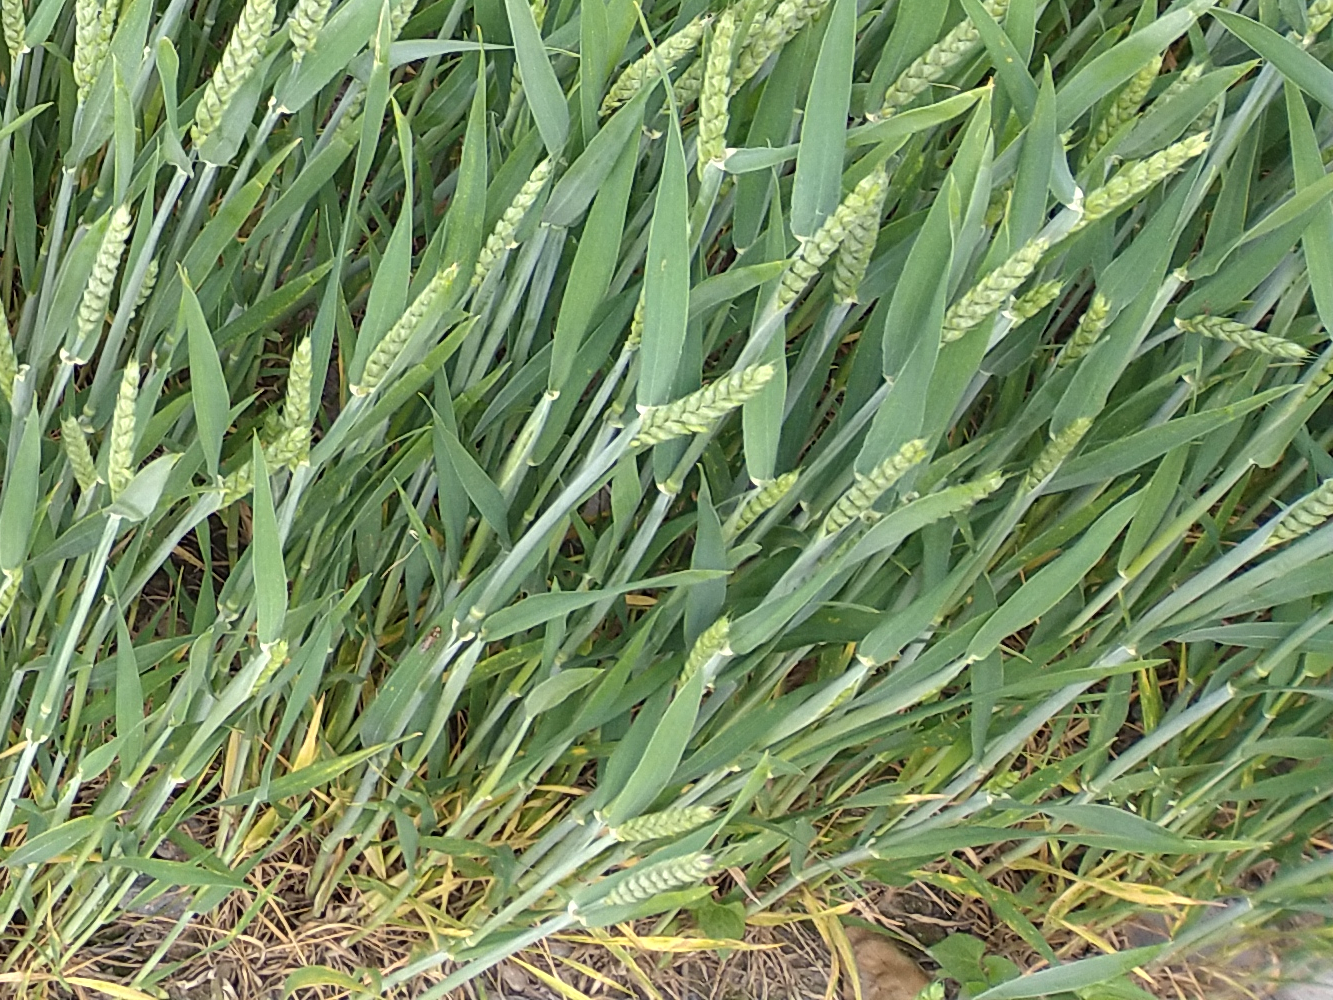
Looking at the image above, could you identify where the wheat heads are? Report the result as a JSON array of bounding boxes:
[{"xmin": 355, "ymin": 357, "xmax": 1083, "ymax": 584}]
[
  {"xmin": 77, "ymin": 204, "xmax": 132, "ymax": 332},
  {"xmin": 1291, "ymin": 0, "xmax": 1333, "ymax": 41},
  {"xmin": 472, "ymin": 162, "xmax": 558, "ymax": 289},
  {"xmin": 725, "ymin": 0, "xmax": 829, "ymax": 93},
  {"xmin": 1269, "ymin": 487, "xmax": 1333, "ymax": 545},
  {"xmin": 737, "ymin": 474, "xmax": 800, "ymax": 530},
  {"xmin": 788, "ymin": 0, "xmax": 857, "ymax": 38},
  {"xmin": 1016, "ymin": 277, "xmax": 1059, "ymax": 321},
  {"xmin": 1075, "ymin": 146, "xmax": 1208, "ymax": 233},
  {"xmin": 927, "ymin": 474, "xmax": 1004, "ymax": 523},
  {"xmin": 285, "ymin": 337, "xmax": 311, "ymax": 465},
  {"xmin": 192, "ymin": 0, "xmax": 276, "ymax": 151},
  {"xmin": 1152, "ymin": 68, "xmax": 1202, "ymax": 117},
  {"xmin": 133, "ymin": 260, "xmax": 158, "ymax": 316},
  {"xmin": 505, "ymin": 6, "xmax": 538, "ymax": 120},
  {"xmin": 363, "ymin": 266, "xmax": 458, "ymax": 397},
  {"xmin": 683, "ymin": 618, "xmax": 730, "ymax": 690},
  {"xmin": 696, "ymin": 11, "xmax": 734, "ymax": 174},
  {"xmin": 97, "ymin": 0, "xmax": 126, "ymax": 55},
  {"xmin": 622, "ymin": 291, "xmax": 646, "ymax": 346},
  {"xmin": 109, "ymin": 356, "xmax": 139, "ymax": 495},
  {"xmin": 1074, "ymin": 52, "xmax": 1162, "ymax": 174},
  {"xmin": 780, "ymin": 176, "xmax": 876, "ymax": 310},
  {"xmin": 1028, "ymin": 420, "xmax": 1088, "ymax": 490},
  {"xmin": 722, "ymin": 0, "xmax": 800, "ymax": 45},
  {"xmin": 1056, "ymin": 293, "xmax": 1110, "ymax": 371},
  {"xmin": 60, "ymin": 415, "xmax": 94, "ymax": 495},
  {"xmin": 256, "ymin": 644, "xmax": 285, "ymax": 689},
  {"xmin": 824, "ymin": 439, "xmax": 929, "ymax": 532},
  {"xmin": 1185, "ymin": 93, "xmax": 1220, "ymax": 142},
  {"xmin": 222, "ymin": 424, "xmax": 311, "ymax": 506},
  {"xmin": 1185, "ymin": 310, "xmax": 1310, "ymax": 359},
  {"xmin": 1294, "ymin": 360, "xmax": 1333, "ymax": 407},
  {"xmin": 884, "ymin": 0, "xmax": 1011, "ymax": 111},
  {"xmin": 834, "ymin": 515, "xmax": 884, "ymax": 570},
  {"xmin": 635, "ymin": 363, "xmax": 774, "ymax": 449},
  {"xmin": 611, "ymin": 808, "xmax": 713, "ymax": 844},
  {"xmin": 835, "ymin": 173, "xmax": 888, "ymax": 295},
  {"xmin": 74, "ymin": 0, "xmax": 100, "ymax": 87},
  {"xmin": 601, "ymin": 16, "xmax": 713, "ymax": 120},
  {"xmin": 327, "ymin": 0, "xmax": 422, "ymax": 148},
  {"xmin": 939, "ymin": 238, "xmax": 1046, "ymax": 346},
  {"xmin": 2, "ymin": 0, "xmax": 27, "ymax": 49},
  {"xmin": 0, "ymin": 285, "xmax": 17, "ymax": 398},
  {"xmin": 600, "ymin": 853, "xmax": 713, "ymax": 906},
  {"xmin": 288, "ymin": 0, "xmax": 362, "ymax": 45},
  {"xmin": 0, "ymin": 564, "xmax": 23, "ymax": 633}
]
